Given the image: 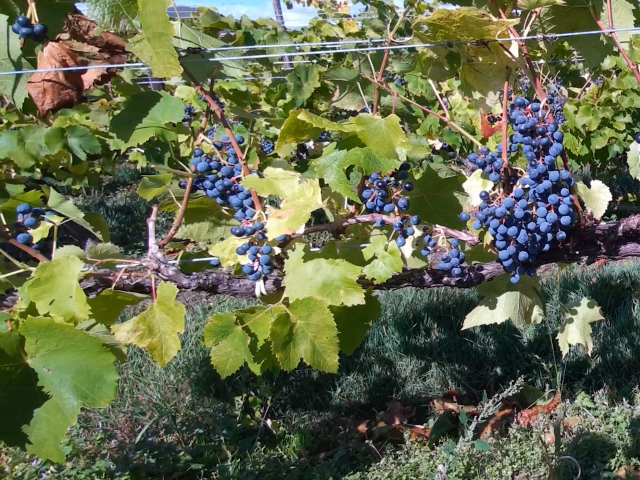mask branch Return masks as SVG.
<instances>
[{
  "mask_svg": "<svg viewBox=\"0 0 640 480\" xmlns=\"http://www.w3.org/2000/svg\"><path fill=\"white\" fill-rule=\"evenodd\" d=\"M388 54H389V51H384V52H383V56H382V59H381L380 65H379V67H378V72H377L376 78H375V77H373V76H372V75H370V74H367V73H363V74H362V77H363L364 79H367V80L371 81V82L375 85V87H374V98H373V109H372V114H373V115H376V114H377V111H378V101H379V89H381V90H383L385 93H388V94H390L391 96H394V97H396V98H398V99H401V100H403V101H406V102H408V103H410V104H412V105H414V106H416V107H419V108H420V109H422L423 111H425V112H427V113H429V114H431V115L435 116V117H436L438 120H440L441 122H443V123H445V124L449 125V126H450V127H452V128H455V130H456L457 132H459L461 135H463L464 137H466L470 142H472V143H473V145H474V146H476L477 148H481V147H482V144H481L480 142H478V141L476 140V138H475V137H472V135H471L469 132H467V131H466V130H464L463 128L459 127L457 123L452 122L451 120H449V119H447L446 117L442 116L440 113H438V112H437V111H435L434 109H431V108H429V107L425 106L422 102H418V101L414 100L413 98H410V97L405 96V95H403V94H400V93H398V92H396V91H393L392 89L388 88L387 86H385V85H383V84L381 83V77H382L383 70H384V67H385L386 62H387V59H388Z\"/></svg>",
  "mask_w": 640,
  "mask_h": 480,
  "instance_id": "obj_1",
  "label": "branch"
},
{
  "mask_svg": "<svg viewBox=\"0 0 640 480\" xmlns=\"http://www.w3.org/2000/svg\"><path fill=\"white\" fill-rule=\"evenodd\" d=\"M182 73L185 74V76L187 77V79L193 84V86L201 93L204 94L208 99L206 102V110H205V114L203 117V121H202V125H201V130L199 133L198 138L196 139V147L200 148L201 147V142L205 136V132H206V127H207V123L209 120V116H210V112H211V105L214 108V110L216 111L218 118L220 119V123L222 124L223 129L225 130V132L227 133V136L230 140V142L232 143V146L234 148V151L240 161V168L243 172V174L245 176H248L250 174V171L246 168L245 165V158L242 155V152L238 146L237 141L234 138V135L232 134L231 129L228 127L227 122L225 120V116L223 115L219 105L217 104L215 98L213 97V91H214V83H215V78L211 77L209 80V89L208 91L206 89H204L201 85H199V83L196 81V79L190 74V72L187 69H183Z\"/></svg>",
  "mask_w": 640,
  "mask_h": 480,
  "instance_id": "obj_2",
  "label": "branch"
},
{
  "mask_svg": "<svg viewBox=\"0 0 640 480\" xmlns=\"http://www.w3.org/2000/svg\"><path fill=\"white\" fill-rule=\"evenodd\" d=\"M512 75V70L508 69L506 72V76L504 79V86L502 92V108H503V119H502V130H501V138H502V153L501 160L503 163V176H502V184L504 187V193L506 195L510 194L509 185H508V160H507V121H508V106H507V95L509 88V81Z\"/></svg>",
  "mask_w": 640,
  "mask_h": 480,
  "instance_id": "obj_3",
  "label": "branch"
},
{
  "mask_svg": "<svg viewBox=\"0 0 640 480\" xmlns=\"http://www.w3.org/2000/svg\"><path fill=\"white\" fill-rule=\"evenodd\" d=\"M192 183H193V177L189 176L188 177V181H187V185L184 191V196L182 198V202L180 204V207L174 217L173 223L170 227V230L163 236V238L160 240L159 245L161 247H165L167 245V242L175 235V233L177 232V229L180 226L181 223V219L183 217V215L185 214V211L187 210V206H188V199H189V193L192 187Z\"/></svg>",
  "mask_w": 640,
  "mask_h": 480,
  "instance_id": "obj_4",
  "label": "branch"
},
{
  "mask_svg": "<svg viewBox=\"0 0 640 480\" xmlns=\"http://www.w3.org/2000/svg\"><path fill=\"white\" fill-rule=\"evenodd\" d=\"M518 45H519L520 50L522 51V53H523V55H524V57H525V59L527 61V65H528V67L530 69V72H531L534 80L537 83L538 92H539V94H540V96L542 98V101H543V107L547 112L548 122L552 123L553 122V114H552L551 107L548 104V98H547L546 93L544 92L542 81H541L539 75L537 74V72L535 70V67H534L532 59H531V57L529 55V52L525 48L524 42H518Z\"/></svg>",
  "mask_w": 640,
  "mask_h": 480,
  "instance_id": "obj_5",
  "label": "branch"
},
{
  "mask_svg": "<svg viewBox=\"0 0 640 480\" xmlns=\"http://www.w3.org/2000/svg\"><path fill=\"white\" fill-rule=\"evenodd\" d=\"M0 236L4 238L6 241H8L10 244H12L13 246L19 248L20 250L28 252L32 257L36 258L38 261H42L43 263L48 262V259L45 256H43L36 250L19 243L18 241L14 240L12 237L7 235L3 231H0Z\"/></svg>",
  "mask_w": 640,
  "mask_h": 480,
  "instance_id": "obj_6",
  "label": "branch"
},
{
  "mask_svg": "<svg viewBox=\"0 0 640 480\" xmlns=\"http://www.w3.org/2000/svg\"><path fill=\"white\" fill-rule=\"evenodd\" d=\"M611 37L613 39V41L615 42L616 48H617V53L621 56V58L624 60V62L626 63L628 69L631 71V73L634 76V79L637 82V85L640 86V77L638 72L636 71L635 67L633 66V64L631 63V61L629 60V58L626 56V54L624 53V51L622 50V45L620 40L618 39L617 35L615 33L611 34Z\"/></svg>",
  "mask_w": 640,
  "mask_h": 480,
  "instance_id": "obj_7",
  "label": "branch"
},
{
  "mask_svg": "<svg viewBox=\"0 0 640 480\" xmlns=\"http://www.w3.org/2000/svg\"><path fill=\"white\" fill-rule=\"evenodd\" d=\"M411 11H412V7L411 6H408L405 9V12L403 13L402 17L399 19L397 24L390 31L389 40L387 42V45H390V44L394 43L393 38L395 37L396 32L402 27V25L406 21V19H407L408 15L410 14Z\"/></svg>",
  "mask_w": 640,
  "mask_h": 480,
  "instance_id": "obj_8",
  "label": "branch"
},
{
  "mask_svg": "<svg viewBox=\"0 0 640 480\" xmlns=\"http://www.w3.org/2000/svg\"><path fill=\"white\" fill-rule=\"evenodd\" d=\"M570 193H571V196H572V199H573V203H574V205H575V207L577 209V213L580 216V220H581L585 214H584V212L582 210L580 202L578 201V197H577L576 190H575L574 186L570 187Z\"/></svg>",
  "mask_w": 640,
  "mask_h": 480,
  "instance_id": "obj_9",
  "label": "branch"
},
{
  "mask_svg": "<svg viewBox=\"0 0 640 480\" xmlns=\"http://www.w3.org/2000/svg\"><path fill=\"white\" fill-rule=\"evenodd\" d=\"M251 197H252V201H253V203L255 205V209L259 210V211H262L263 210V205H262V203L260 201V197L256 195L255 191L251 192Z\"/></svg>",
  "mask_w": 640,
  "mask_h": 480,
  "instance_id": "obj_10",
  "label": "branch"
},
{
  "mask_svg": "<svg viewBox=\"0 0 640 480\" xmlns=\"http://www.w3.org/2000/svg\"><path fill=\"white\" fill-rule=\"evenodd\" d=\"M493 6H494L495 10L497 11V13H498L499 17H500L502 20H505V19H506V16H505V14L503 13L502 8L500 7L499 3H498V2H494V3H493Z\"/></svg>",
  "mask_w": 640,
  "mask_h": 480,
  "instance_id": "obj_11",
  "label": "branch"
},
{
  "mask_svg": "<svg viewBox=\"0 0 640 480\" xmlns=\"http://www.w3.org/2000/svg\"><path fill=\"white\" fill-rule=\"evenodd\" d=\"M560 156H561V161H562L563 167H564L566 170H569V169H570V166H569V164H568V162H567L565 152H564V151H561V152H560Z\"/></svg>",
  "mask_w": 640,
  "mask_h": 480,
  "instance_id": "obj_12",
  "label": "branch"
}]
</instances>
